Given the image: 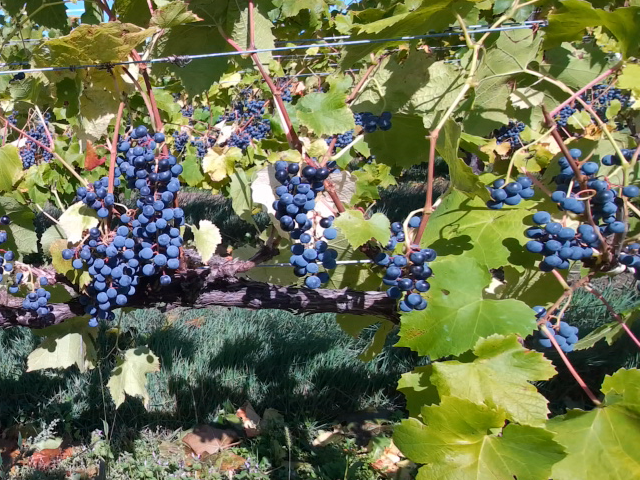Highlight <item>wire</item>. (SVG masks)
<instances>
[{"label": "wire", "mask_w": 640, "mask_h": 480, "mask_svg": "<svg viewBox=\"0 0 640 480\" xmlns=\"http://www.w3.org/2000/svg\"><path fill=\"white\" fill-rule=\"evenodd\" d=\"M461 34H462L461 30H450V31L433 33V34H421V35L399 36V37H383V38H375V39H367V40H350L351 39L350 35H327V36H320L315 38H285V39H277L275 41V44L276 45L288 44V43H317V44L273 47L270 49L266 48V49H259V50H218V51L209 52V53L191 54V55L178 56V57L149 58V59H142V60L130 58L122 61H114L113 63H90V64H79L75 66L10 69V70H1L0 76L22 74V73H49V72H59V71H77L81 69H92V68H115L117 66H124L129 64H139L140 66H143L145 64H151V63L180 62V61H188V60L201 59V58H215L220 55H268L275 52L315 50L322 47H344V46H351V45H369V44H377V43H385V42H401V41H413V40H423V39H435V38H442V37L461 35Z\"/></svg>", "instance_id": "d2f4af69"}, {"label": "wire", "mask_w": 640, "mask_h": 480, "mask_svg": "<svg viewBox=\"0 0 640 480\" xmlns=\"http://www.w3.org/2000/svg\"><path fill=\"white\" fill-rule=\"evenodd\" d=\"M500 27H491L490 23L469 24L465 26L468 34L473 33H493L502 31H516L525 29L547 28L546 19L526 20V21H502Z\"/></svg>", "instance_id": "a73af890"}, {"label": "wire", "mask_w": 640, "mask_h": 480, "mask_svg": "<svg viewBox=\"0 0 640 480\" xmlns=\"http://www.w3.org/2000/svg\"><path fill=\"white\" fill-rule=\"evenodd\" d=\"M281 267L290 268L291 264L289 262H278L273 264L263 263L257 268L275 269V268H281Z\"/></svg>", "instance_id": "4f2155b8"}]
</instances>
